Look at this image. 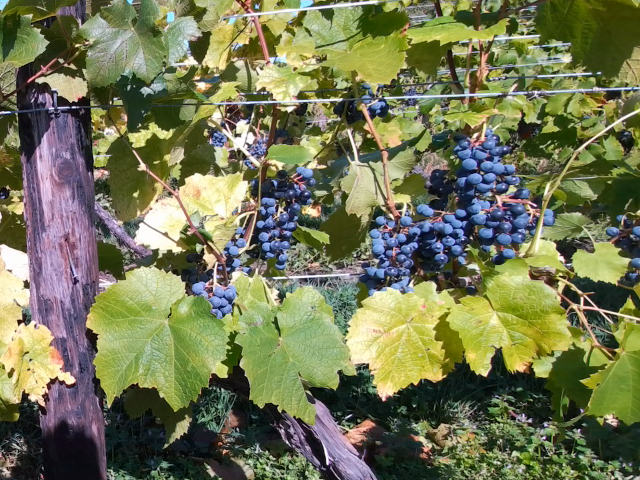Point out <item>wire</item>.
Masks as SVG:
<instances>
[{
	"label": "wire",
	"instance_id": "obj_5",
	"mask_svg": "<svg viewBox=\"0 0 640 480\" xmlns=\"http://www.w3.org/2000/svg\"><path fill=\"white\" fill-rule=\"evenodd\" d=\"M359 271L344 273H300V274H281L276 276H264V281H279L283 279H302V278H346L358 277Z\"/></svg>",
	"mask_w": 640,
	"mask_h": 480
},
{
	"label": "wire",
	"instance_id": "obj_3",
	"mask_svg": "<svg viewBox=\"0 0 640 480\" xmlns=\"http://www.w3.org/2000/svg\"><path fill=\"white\" fill-rule=\"evenodd\" d=\"M379 4H380L379 0H373V1H364V2L335 3V4H326V5L306 6V7H300V8L267 9L263 11H255L252 13L225 14L224 18L225 19H244V18H254L257 16H265L270 14L303 13L308 11L329 10V9H337V8L375 6Z\"/></svg>",
	"mask_w": 640,
	"mask_h": 480
},
{
	"label": "wire",
	"instance_id": "obj_4",
	"mask_svg": "<svg viewBox=\"0 0 640 480\" xmlns=\"http://www.w3.org/2000/svg\"><path fill=\"white\" fill-rule=\"evenodd\" d=\"M124 104H63L43 108H27L19 110H0V115H22L29 113H45L50 111H62L66 109H124Z\"/></svg>",
	"mask_w": 640,
	"mask_h": 480
},
{
	"label": "wire",
	"instance_id": "obj_1",
	"mask_svg": "<svg viewBox=\"0 0 640 480\" xmlns=\"http://www.w3.org/2000/svg\"><path fill=\"white\" fill-rule=\"evenodd\" d=\"M640 91L639 85L632 86H591V87H575V88H557V89H533L525 91L513 92H431L423 94H404V95H386L375 96L373 102L388 100H411L425 99L433 97H515L527 96L534 94H559V93H578L593 91Z\"/></svg>",
	"mask_w": 640,
	"mask_h": 480
},
{
	"label": "wire",
	"instance_id": "obj_2",
	"mask_svg": "<svg viewBox=\"0 0 640 480\" xmlns=\"http://www.w3.org/2000/svg\"><path fill=\"white\" fill-rule=\"evenodd\" d=\"M362 97H308L300 100H225L154 103V108L228 105H302L311 102H361Z\"/></svg>",
	"mask_w": 640,
	"mask_h": 480
}]
</instances>
